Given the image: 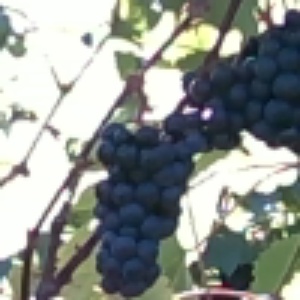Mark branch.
Wrapping results in <instances>:
<instances>
[{
	"label": "branch",
	"mask_w": 300,
	"mask_h": 300,
	"mask_svg": "<svg viewBox=\"0 0 300 300\" xmlns=\"http://www.w3.org/2000/svg\"><path fill=\"white\" fill-rule=\"evenodd\" d=\"M242 4V0H230V6L225 16L222 28L220 33L216 39V42L213 46L211 52H209L204 58L203 62L198 65L196 71L198 73H203L207 68L211 66L213 62H215L218 58V52L221 49V46L224 42V39L227 35L229 27L233 24L234 18Z\"/></svg>",
	"instance_id": "branch-2"
},
{
	"label": "branch",
	"mask_w": 300,
	"mask_h": 300,
	"mask_svg": "<svg viewBox=\"0 0 300 300\" xmlns=\"http://www.w3.org/2000/svg\"><path fill=\"white\" fill-rule=\"evenodd\" d=\"M193 21L192 17H189L184 22L177 25L171 34L168 36V39L161 45V47L154 53V55L150 56L148 59L144 61V66L141 67L138 71H136L131 79L126 84L124 90L119 95L115 103L111 106V108L107 111L106 115L103 117L100 122L98 128L93 134L91 140H88L86 144L81 149V153L79 156V160L76 163V167L74 170L68 174L64 181L61 183V186L58 190L55 191L49 205L44 211L40 221L37 223L35 227L27 230V246L23 250L18 252L17 258L20 261H23L22 269L20 271V300H30V291H31V267H32V242L36 236H39L40 229L45 223L47 217L49 216L51 210L53 209L58 197L63 193L66 186L70 183L69 188L67 190V200L62 202V207L58 212L56 218H54L51 222L49 234V243L47 249V255L44 260L43 266V278L41 281V286L37 290L36 300H52L56 298L62 289L69 285L72 282L74 270L83 265L86 260L93 253L96 245L100 241V236L102 233V229L97 227L94 233H91L85 243L79 248L77 253L67 262L64 269L57 275V278L53 279V272L56 266V249L63 245V241L60 239V234L63 232V224L68 218L70 211L73 208V198L76 196V192L74 187L77 183V179L79 178L81 169L84 167V164L92 152L97 139L102 132L104 126L108 122L109 118L116 111V109L121 105L122 101L127 99L130 93L137 88L140 83L144 80V72L149 70L154 63H156L159 58L162 56L164 50L168 47L170 43H172L176 37L181 34L184 29Z\"/></svg>",
	"instance_id": "branch-1"
}]
</instances>
